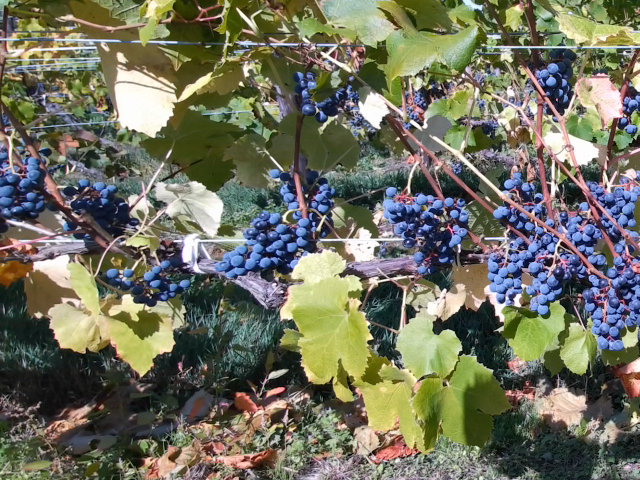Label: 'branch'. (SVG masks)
Segmentation results:
<instances>
[{"label": "branch", "mask_w": 640, "mask_h": 480, "mask_svg": "<svg viewBox=\"0 0 640 480\" xmlns=\"http://www.w3.org/2000/svg\"><path fill=\"white\" fill-rule=\"evenodd\" d=\"M639 54H640V49H636L634 54H633V56H632L630 64H629V68H628V71H627L628 75H631L633 73L634 66H635V63L637 61V58L639 57Z\"/></svg>", "instance_id": "7c5c6f52"}, {"label": "branch", "mask_w": 640, "mask_h": 480, "mask_svg": "<svg viewBox=\"0 0 640 480\" xmlns=\"http://www.w3.org/2000/svg\"><path fill=\"white\" fill-rule=\"evenodd\" d=\"M629 81H630V78H629V77H626V78L624 79L623 84H622V88L620 89V97H621L622 99H625V98H626V93H627V89H628Z\"/></svg>", "instance_id": "46de074c"}, {"label": "branch", "mask_w": 640, "mask_h": 480, "mask_svg": "<svg viewBox=\"0 0 640 480\" xmlns=\"http://www.w3.org/2000/svg\"><path fill=\"white\" fill-rule=\"evenodd\" d=\"M526 15L529 19V26H530V30L532 32V45H538L539 41H538V34H537V29H536V22L533 16V9H532V2L528 1L527 2V12Z\"/></svg>", "instance_id": "1af6ec82"}, {"label": "branch", "mask_w": 640, "mask_h": 480, "mask_svg": "<svg viewBox=\"0 0 640 480\" xmlns=\"http://www.w3.org/2000/svg\"><path fill=\"white\" fill-rule=\"evenodd\" d=\"M501 223L503 224L504 227H506L510 232H512L516 237H518L525 244L530 243V240L526 238L523 233L519 232L512 225H510L505 218L501 219Z\"/></svg>", "instance_id": "8bde2521"}, {"label": "branch", "mask_w": 640, "mask_h": 480, "mask_svg": "<svg viewBox=\"0 0 640 480\" xmlns=\"http://www.w3.org/2000/svg\"><path fill=\"white\" fill-rule=\"evenodd\" d=\"M513 52L515 53L516 57L518 58L519 62L521 63L522 67L524 68V70L526 71L528 76L530 77V80L533 82V85L537 90L536 95H537L538 98H537L536 129H534L532 123L528 120V117H527L526 113L520 107H518L516 104H514L513 102H510L509 100H507L506 98H504L502 96H499V95H496V94L492 93L483 82L478 80L476 77L472 76V74L469 73L467 70H463L462 74L466 78H468L470 81H472L473 83L478 85L484 91V93L487 94L491 99L497 100V101L503 103L504 105H506L508 107H511L518 114H520V116L522 117L523 122L527 125L532 137L538 141L539 147L537 148V161H538V167L540 168L541 188H542L543 195H544L543 196V202L545 204V207L547 208L548 218L549 219H553L554 215H553L552 206L550 204L551 201H552V196L548 193V188H547V185H546L545 164L543 163V153L544 152L547 154L549 159L552 162H554L561 169V171L564 172L567 175V177L570 179V181L579 190H581L583 192L585 202L587 204L588 209L591 211L593 218L596 221L600 220V217L598 216L597 211H596V208H597L605 216L606 220L619 232L620 236L622 238H624L625 240H627L630 244H632V246L637 251V253L640 254V246H639V244L633 238H631L628 234H626L624 232L623 228L614 219H612V217L610 216L609 212L592 197L591 192L588 190V188L586 186V183L584 182V180H583V178L581 176V173H580V170H579V167H578V161H577V158H576V152H575L574 147L572 146V143L570 141V134L566 129L563 117L561 116V114L558 111V109L551 103V101L549 100V98L547 97L545 92L543 91V89L540 86L538 80L536 79L534 73L530 69V67L527 64V62L525 61L524 57L521 55L520 51L513 49ZM543 101L552 110L553 114L555 115V117L559 121L561 131H562V133H563V135L565 137L566 146H567V148H568V150H569V152L571 154V160H572L573 169H574V172H575V175H576V179L573 176L572 172L569 169H567L561 163V161L558 158H556L554 156V154L550 151V149L546 146L544 140L542 139Z\"/></svg>", "instance_id": "30e6481e"}, {"label": "branch", "mask_w": 640, "mask_h": 480, "mask_svg": "<svg viewBox=\"0 0 640 480\" xmlns=\"http://www.w3.org/2000/svg\"><path fill=\"white\" fill-rule=\"evenodd\" d=\"M385 120L392 127V129L398 134V136L401 139L402 143L406 147L408 153L413 158L415 164L418 166V168L422 172V175L424 176L425 180L428 182V184L431 186V188L439 195L441 200L445 199L444 192L431 179V177L429 176V173L427 172V170L423 166V164L420 161L419 157L414 152L413 148L409 144V142L406 139V137L403 134V132H405V133H407L409 135V137L413 140V142L419 148L422 149V151L431 159L432 162L435 163V165L439 168V170L445 176H448L449 178H451V180L454 183H456V184L460 185L461 187H463L472 197H474L475 200H477L480 204L484 205L489 210L490 213H494L495 212L494 207L492 205H490V203L487 200H485L482 197H480L476 192L473 191V189L467 183H465L461 179L457 178L452 172L446 170L445 167L442 165V163L428 150V148L415 136V134L409 128H407L405 125L400 123L394 117L390 118L389 115L385 116Z\"/></svg>", "instance_id": "325d2c04"}, {"label": "branch", "mask_w": 640, "mask_h": 480, "mask_svg": "<svg viewBox=\"0 0 640 480\" xmlns=\"http://www.w3.org/2000/svg\"><path fill=\"white\" fill-rule=\"evenodd\" d=\"M328 51V48L324 47L321 49H317L316 53L317 58L321 59L322 57L327 58L328 60H330L332 63H335L336 65H338L340 68H342L343 70L347 71L348 73H350V75L355 79V81L359 84L362 85L364 87H368L369 83L362 80L357 73L355 72L354 69H352L351 67L345 65L344 63H342L340 60H338L337 58H334L332 55H330L329 53H326Z\"/></svg>", "instance_id": "ea751061"}, {"label": "branch", "mask_w": 640, "mask_h": 480, "mask_svg": "<svg viewBox=\"0 0 640 480\" xmlns=\"http://www.w3.org/2000/svg\"><path fill=\"white\" fill-rule=\"evenodd\" d=\"M371 92L374 93L377 97H379L386 105H388L400 118H404L405 114L398 109V107L393 104L386 96H384L381 92H379L376 88H372Z\"/></svg>", "instance_id": "2b1400db"}, {"label": "branch", "mask_w": 640, "mask_h": 480, "mask_svg": "<svg viewBox=\"0 0 640 480\" xmlns=\"http://www.w3.org/2000/svg\"><path fill=\"white\" fill-rule=\"evenodd\" d=\"M467 235L469 236V238L471 239V242L476 245L479 249H481L482 251H485L486 253L489 252V248L484 245L482 242H480V238L478 236H475L472 233L471 229L467 230Z\"/></svg>", "instance_id": "a944a4c4"}, {"label": "branch", "mask_w": 640, "mask_h": 480, "mask_svg": "<svg viewBox=\"0 0 640 480\" xmlns=\"http://www.w3.org/2000/svg\"><path fill=\"white\" fill-rule=\"evenodd\" d=\"M43 183L48 188V190L53 195V203L59 206V210L63 211L68 218L72 219L79 227L85 230L86 234H89V237L93 239L98 245L101 247L108 249L110 241L106 239L103 235L99 234L92 226L86 223L82 218L75 215L66 204L64 198L61 195V192L58 189L57 183L52 179L49 173L45 174V178L43 179ZM109 253L112 255H122L123 257H127L129 259H138L140 257L139 253L132 254L127 252L126 250L120 249L115 244H112L109 248Z\"/></svg>", "instance_id": "45aa463d"}, {"label": "branch", "mask_w": 640, "mask_h": 480, "mask_svg": "<svg viewBox=\"0 0 640 480\" xmlns=\"http://www.w3.org/2000/svg\"><path fill=\"white\" fill-rule=\"evenodd\" d=\"M617 124H618V120L614 119L611 125V131H610V138H609V143H608V147H607V151H606V157H605V161H604V169L601 170V175H600V182L604 183L605 182V178L606 175L609 173L610 168H611V154H612V149H613V145H614V141H615V133H616V128H617Z\"/></svg>", "instance_id": "ca6c30ca"}, {"label": "branch", "mask_w": 640, "mask_h": 480, "mask_svg": "<svg viewBox=\"0 0 640 480\" xmlns=\"http://www.w3.org/2000/svg\"><path fill=\"white\" fill-rule=\"evenodd\" d=\"M295 100H296L295 115L297 116V121L295 125V135L293 136L294 150H295L294 156H293V176H294L297 196L300 202V210H301L302 218L306 219L307 211L305 207V199L302 193L299 174H298V159L300 155V141L302 138V124H303V116L300 112L301 98L299 94L295 95Z\"/></svg>", "instance_id": "982ccf7c"}, {"label": "branch", "mask_w": 640, "mask_h": 480, "mask_svg": "<svg viewBox=\"0 0 640 480\" xmlns=\"http://www.w3.org/2000/svg\"><path fill=\"white\" fill-rule=\"evenodd\" d=\"M602 238L605 241L606 245L609 247L610 253L613 257L618 258L619 254L616 252L615 247L612 243V241L609 239V237L607 236L606 232L602 233Z\"/></svg>", "instance_id": "afce2bb1"}, {"label": "branch", "mask_w": 640, "mask_h": 480, "mask_svg": "<svg viewBox=\"0 0 640 480\" xmlns=\"http://www.w3.org/2000/svg\"><path fill=\"white\" fill-rule=\"evenodd\" d=\"M428 137L431 138L432 140H434L440 146H442L443 149H445L448 152H450L451 154L455 155L463 164H465L468 168H470L477 176H479L485 182L486 186L489 189H491L492 192L498 198H500L502 201H504L505 203L509 204L510 206L514 207L515 209H518V210L524 212L525 215L530 220H532L533 222H535L539 226L543 227L547 232L551 233L553 236H555L557 239H559L565 245L566 248H568L572 253H574L575 256H577L581 261H583V264L587 267L588 270H590L591 272L596 274L599 278H602L604 280H608L609 279L608 275L602 273L600 270H598L594 266H592L589 263L588 258L585 257L582 253H580L574 246H572V244L569 241H567L566 238L564 236H562L559 232H557L555 229L549 227L548 224H546L545 222H543L542 220L538 219L533 214H531L530 210L527 207L522 206V205L512 201L510 198H507L505 195H503L490 182V180L487 178V176L485 174H483L480 170H478V168L475 167L470 161H468L461 153H459L453 147H450L448 144H446L444 141H442L438 136L434 135L433 133H429Z\"/></svg>", "instance_id": "170604dd"}, {"label": "branch", "mask_w": 640, "mask_h": 480, "mask_svg": "<svg viewBox=\"0 0 640 480\" xmlns=\"http://www.w3.org/2000/svg\"><path fill=\"white\" fill-rule=\"evenodd\" d=\"M486 4L488 6V9L493 17L494 22L498 25L499 29L501 30L502 34L505 37V40L508 44H514V41L510 38V35L506 29V27L503 25V23L499 20L498 15L494 9V6L492 4L491 0H487Z\"/></svg>", "instance_id": "1d269e1b"}, {"label": "branch", "mask_w": 640, "mask_h": 480, "mask_svg": "<svg viewBox=\"0 0 640 480\" xmlns=\"http://www.w3.org/2000/svg\"><path fill=\"white\" fill-rule=\"evenodd\" d=\"M0 106V110L10 119V124L17 131L24 144L26 145L30 156L32 158L38 157L39 151L33 141L27 136V133L23 128V123L13 114L8 105L3 100H0Z\"/></svg>", "instance_id": "1ff4a987"}]
</instances>
